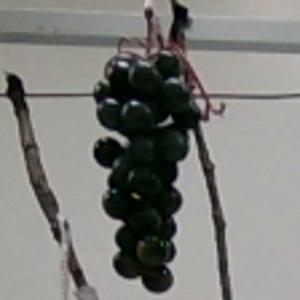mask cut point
Instances as JSON below:
<instances>
[{
    "label": "cut point",
    "mask_w": 300,
    "mask_h": 300,
    "mask_svg": "<svg viewBox=\"0 0 300 300\" xmlns=\"http://www.w3.org/2000/svg\"><path fill=\"white\" fill-rule=\"evenodd\" d=\"M143 17L146 20V47L145 60L150 61L152 57V29L155 11L153 8V0H144Z\"/></svg>",
    "instance_id": "1"
}]
</instances>
